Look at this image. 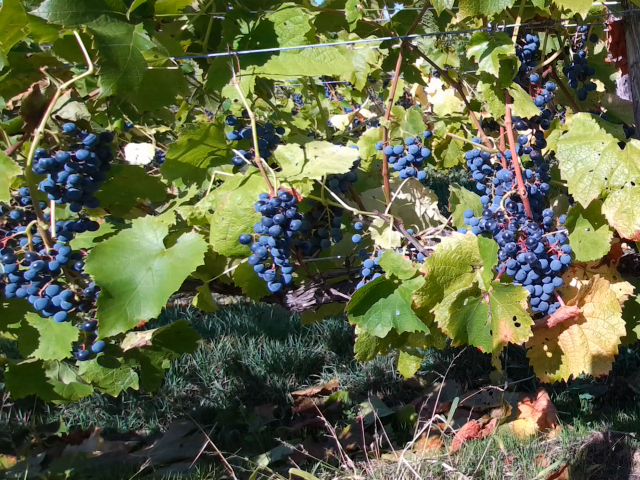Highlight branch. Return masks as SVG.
Segmentation results:
<instances>
[{
  "mask_svg": "<svg viewBox=\"0 0 640 480\" xmlns=\"http://www.w3.org/2000/svg\"><path fill=\"white\" fill-rule=\"evenodd\" d=\"M362 22L368 23L369 25H371L372 27L385 31L386 33L390 34V35H397V32L393 29H390L388 26H384L381 24H378L377 22H374L373 20H371L370 18L367 17H362L361 18Z\"/></svg>",
  "mask_w": 640,
  "mask_h": 480,
  "instance_id": "branch-6",
  "label": "branch"
},
{
  "mask_svg": "<svg viewBox=\"0 0 640 480\" xmlns=\"http://www.w3.org/2000/svg\"><path fill=\"white\" fill-rule=\"evenodd\" d=\"M308 10L309 11H319V12H325V13H333V14H337L339 16H343L344 12L339 10V9H335V8H327V7H321V6H312L309 5L308 6Z\"/></svg>",
  "mask_w": 640,
  "mask_h": 480,
  "instance_id": "branch-8",
  "label": "branch"
},
{
  "mask_svg": "<svg viewBox=\"0 0 640 480\" xmlns=\"http://www.w3.org/2000/svg\"><path fill=\"white\" fill-rule=\"evenodd\" d=\"M63 91L62 87H59L54 93L53 96L50 98V103L48 106V109L44 115V117L41 120L40 123V128L38 130V133L36 135V138L33 142V145L30 149V151L27 153L26 156V168H27V183L29 186V190H30V196H31V203H32V207L34 209L35 212V220H36V225L37 228L39 230V232L42 234L46 244L48 247H51L53 244V240L49 234V232L46 230L44 223H43V217H42V210L38 201V196L35 194V187L32 181V166H31V158L34 155L38 144L42 138L43 132L46 129V126L48 124V120L51 117V114L53 112V109L55 107V104L57 103V98L59 96V94H61Z\"/></svg>",
  "mask_w": 640,
  "mask_h": 480,
  "instance_id": "branch-2",
  "label": "branch"
},
{
  "mask_svg": "<svg viewBox=\"0 0 640 480\" xmlns=\"http://www.w3.org/2000/svg\"><path fill=\"white\" fill-rule=\"evenodd\" d=\"M505 115L507 119V145L511 155L512 167H513L514 175L518 185V195H519L520 201L523 203V206L525 207V213L530 214L531 207H530V201L527 193V188L525 185H523L521 180V172H520L519 163L517 159L516 149L514 147V137L512 133V117H511L509 105L505 106Z\"/></svg>",
  "mask_w": 640,
  "mask_h": 480,
  "instance_id": "branch-4",
  "label": "branch"
},
{
  "mask_svg": "<svg viewBox=\"0 0 640 480\" xmlns=\"http://www.w3.org/2000/svg\"><path fill=\"white\" fill-rule=\"evenodd\" d=\"M229 72H230L231 79H232V81H233V83H234V85H235V87L237 89V92L239 94V97H240L242 103L246 107L247 111L250 113V121H251V128H252V146H253L255 165L259 169V171L261 172L266 187L268 188V190L271 192L272 195H275L276 194V190L272 186V184L270 183L269 178L267 177L266 169L260 163L258 144H257V125H256L255 111L253 110V108L251 107V105L249 104V102L247 101V99H246V97L244 95V92L242 90L240 82L238 81V78L236 76L233 63L229 64Z\"/></svg>",
  "mask_w": 640,
  "mask_h": 480,
  "instance_id": "branch-3",
  "label": "branch"
},
{
  "mask_svg": "<svg viewBox=\"0 0 640 480\" xmlns=\"http://www.w3.org/2000/svg\"><path fill=\"white\" fill-rule=\"evenodd\" d=\"M388 168L389 165L387 164V155L383 154L382 155V170H383V190H384V197H385V209H386V213L390 214L391 210H390V190H389V180H388Z\"/></svg>",
  "mask_w": 640,
  "mask_h": 480,
  "instance_id": "branch-5",
  "label": "branch"
},
{
  "mask_svg": "<svg viewBox=\"0 0 640 480\" xmlns=\"http://www.w3.org/2000/svg\"><path fill=\"white\" fill-rule=\"evenodd\" d=\"M410 41V39H405V40H401V45L398 51V55H397V60H396V64H395V69L393 72V77H392V89H391V93L389 95V99H388V104H387V112L386 115L384 116L385 120H389L391 118V114H392V106H393V102H394V97L396 95L397 92V80H398V74L400 71V67H401V63H402V58H403V53L405 48L410 50L412 53H414L415 55L420 56L423 60L429 62L432 66H434L437 71L441 74V76L443 78H445L449 83H451L455 89L457 90V92L460 95L461 101L462 103L465 105L468 113L470 114V117L472 118L473 122L475 123V126L477 127L478 132L480 133L481 136V140L483 141V143L485 144L487 149H491L492 145L490 143V141L488 140V138L486 137L485 131L482 128V125L480 124V121L478 120L475 112L473 111L471 104L467 101L466 99V95L464 93V91L462 90V87L460 86V84L453 79L446 71L444 68H442L433 58L429 57L426 53L417 50L414 46L408 44V42Z\"/></svg>",
  "mask_w": 640,
  "mask_h": 480,
  "instance_id": "branch-1",
  "label": "branch"
},
{
  "mask_svg": "<svg viewBox=\"0 0 640 480\" xmlns=\"http://www.w3.org/2000/svg\"><path fill=\"white\" fill-rule=\"evenodd\" d=\"M428 9H429V4L425 3L422 10L418 14V17L415 19L411 27L407 30V34H412L415 31L416 27L420 24V21L423 19Z\"/></svg>",
  "mask_w": 640,
  "mask_h": 480,
  "instance_id": "branch-7",
  "label": "branch"
},
{
  "mask_svg": "<svg viewBox=\"0 0 640 480\" xmlns=\"http://www.w3.org/2000/svg\"><path fill=\"white\" fill-rule=\"evenodd\" d=\"M525 5H526V0H521L520 12H519V15H518L517 19L515 20V22H519V21L523 20L524 14H525Z\"/></svg>",
  "mask_w": 640,
  "mask_h": 480,
  "instance_id": "branch-9",
  "label": "branch"
}]
</instances>
